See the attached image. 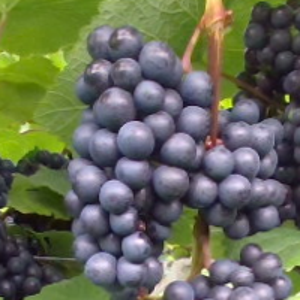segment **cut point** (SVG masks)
<instances>
[{
    "mask_svg": "<svg viewBox=\"0 0 300 300\" xmlns=\"http://www.w3.org/2000/svg\"><path fill=\"white\" fill-rule=\"evenodd\" d=\"M205 27H206V13L200 17L198 24H196L194 34L191 36L189 43L181 57L183 74H189L191 71V54L194 48L196 47V44L199 38L201 37Z\"/></svg>",
    "mask_w": 300,
    "mask_h": 300,
    "instance_id": "6a23745f",
    "label": "cut point"
},
{
    "mask_svg": "<svg viewBox=\"0 0 300 300\" xmlns=\"http://www.w3.org/2000/svg\"><path fill=\"white\" fill-rule=\"evenodd\" d=\"M202 258L204 267H209L214 262V259H211V252L209 251V244L207 239L202 240Z\"/></svg>",
    "mask_w": 300,
    "mask_h": 300,
    "instance_id": "7d7e1d6f",
    "label": "cut point"
}]
</instances>
